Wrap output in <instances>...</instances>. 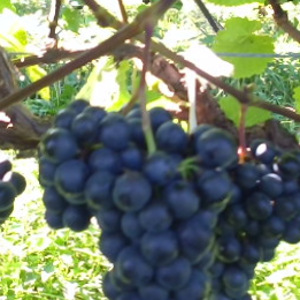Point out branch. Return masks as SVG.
Segmentation results:
<instances>
[{
    "label": "branch",
    "mask_w": 300,
    "mask_h": 300,
    "mask_svg": "<svg viewBox=\"0 0 300 300\" xmlns=\"http://www.w3.org/2000/svg\"><path fill=\"white\" fill-rule=\"evenodd\" d=\"M84 4L92 10L98 24L101 27L108 26L116 29L119 33L113 35L105 42H102L100 46L95 49H92L64 64L62 67L47 76H44L37 81L4 96L0 100L1 108H7L9 105L21 100L22 98L30 96L50 84L59 81L83 65L109 53L111 49L124 42L127 38L134 37L137 41H143L145 39V34L142 31L151 26L152 23H154L159 16L164 13V10L170 6V0H161L158 3L151 5L139 13L133 20V23L129 26L121 20L116 19L107 9L101 7L97 0H84Z\"/></svg>",
    "instance_id": "branch-1"
},
{
    "label": "branch",
    "mask_w": 300,
    "mask_h": 300,
    "mask_svg": "<svg viewBox=\"0 0 300 300\" xmlns=\"http://www.w3.org/2000/svg\"><path fill=\"white\" fill-rule=\"evenodd\" d=\"M152 48L158 50L159 52L169 56L174 61L178 62L183 67H187L188 69L192 70L193 72L197 73V75L205 80L210 81L217 87L225 90L226 92L232 94L239 102V104L253 106V107H260L264 108L269 111H273L276 114L285 115L286 117L294 120L295 122H300V115L297 113L288 110L280 105L271 104L269 102L259 100L251 93L254 89L252 84H249L247 87L240 91L239 89L227 84L226 82L220 80L216 76L204 71L201 67L196 65L193 62H188L185 58L175 53L170 48L165 47L161 43L156 41H152Z\"/></svg>",
    "instance_id": "branch-2"
}]
</instances>
